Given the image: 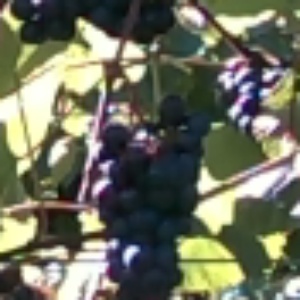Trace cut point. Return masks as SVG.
<instances>
[{
  "mask_svg": "<svg viewBox=\"0 0 300 300\" xmlns=\"http://www.w3.org/2000/svg\"><path fill=\"white\" fill-rule=\"evenodd\" d=\"M148 68L151 75V118L150 124L158 126V121L161 113V74L162 66L160 55H148L146 57Z\"/></svg>",
  "mask_w": 300,
  "mask_h": 300,
  "instance_id": "obj_1",
  "label": "cut point"
}]
</instances>
